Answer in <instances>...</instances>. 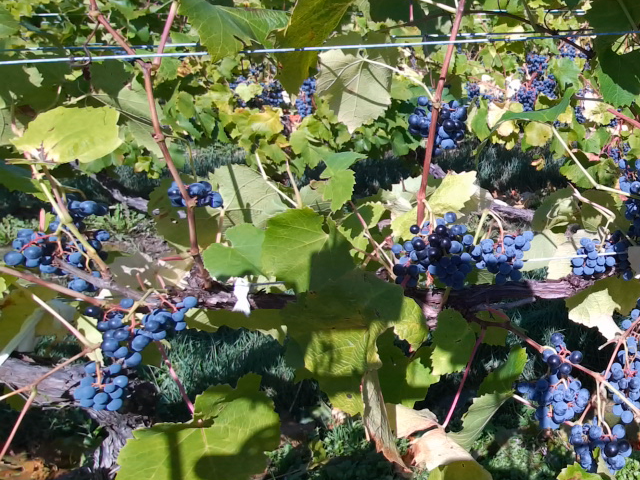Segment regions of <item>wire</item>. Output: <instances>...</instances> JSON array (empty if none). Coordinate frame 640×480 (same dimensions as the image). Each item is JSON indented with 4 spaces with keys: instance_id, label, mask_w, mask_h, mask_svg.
<instances>
[{
    "instance_id": "obj_1",
    "label": "wire",
    "mask_w": 640,
    "mask_h": 480,
    "mask_svg": "<svg viewBox=\"0 0 640 480\" xmlns=\"http://www.w3.org/2000/svg\"><path fill=\"white\" fill-rule=\"evenodd\" d=\"M624 34H640V28L637 29H622L617 31L608 32H584V33H566L557 35H540V36H504V37H480V38H465L462 40H427L416 42H386L375 43L373 45H360V44H336V45H320L309 47H290V46H278V47H259L242 49V54L261 53V52H311V51H323V50H339V49H358V50H376L377 48H389V47H418L429 45H464L468 43H482V42H506V41H542V40H559L569 38H586V37H611Z\"/></svg>"
},
{
    "instance_id": "obj_2",
    "label": "wire",
    "mask_w": 640,
    "mask_h": 480,
    "mask_svg": "<svg viewBox=\"0 0 640 480\" xmlns=\"http://www.w3.org/2000/svg\"><path fill=\"white\" fill-rule=\"evenodd\" d=\"M207 51L196 52H157V53H139V54H106L96 56H84V57H48V58H34L31 60H2L1 66L4 65H33L37 63H51V62H87V61H99L108 59H141V58H159V57H183L191 58L198 56H207Z\"/></svg>"
},
{
    "instance_id": "obj_4",
    "label": "wire",
    "mask_w": 640,
    "mask_h": 480,
    "mask_svg": "<svg viewBox=\"0 0 640 480\" xmlns=\"http://www.w3.org/2000/svg\"><path fill=\"white\" fill-rule=\"evenodd\" d=\"M617 254L628 255L629 251L628 250H618V251H606V252L599 251L598 252V256L599 257H608V256L617 255Z\"/></svg>"
},
{
    "instance_id": "obj_3",
    "label": "wire",
    "mask_w": 640,
    "mask_h": 480,
    "mask_svg": "<svg viewBox=\"0 0 640 480\" xmlns=\"http://www.w3.org/2000/svg\"><path fill=\"white\" fill-rule=\"evenodd\" d=\"M586 257H587L586 253L557 254V255H551V256H545V257H524L523 261L524 262H547V261L560 260V259H576V258H586Z\"/></svg>"
}]
</instances>
